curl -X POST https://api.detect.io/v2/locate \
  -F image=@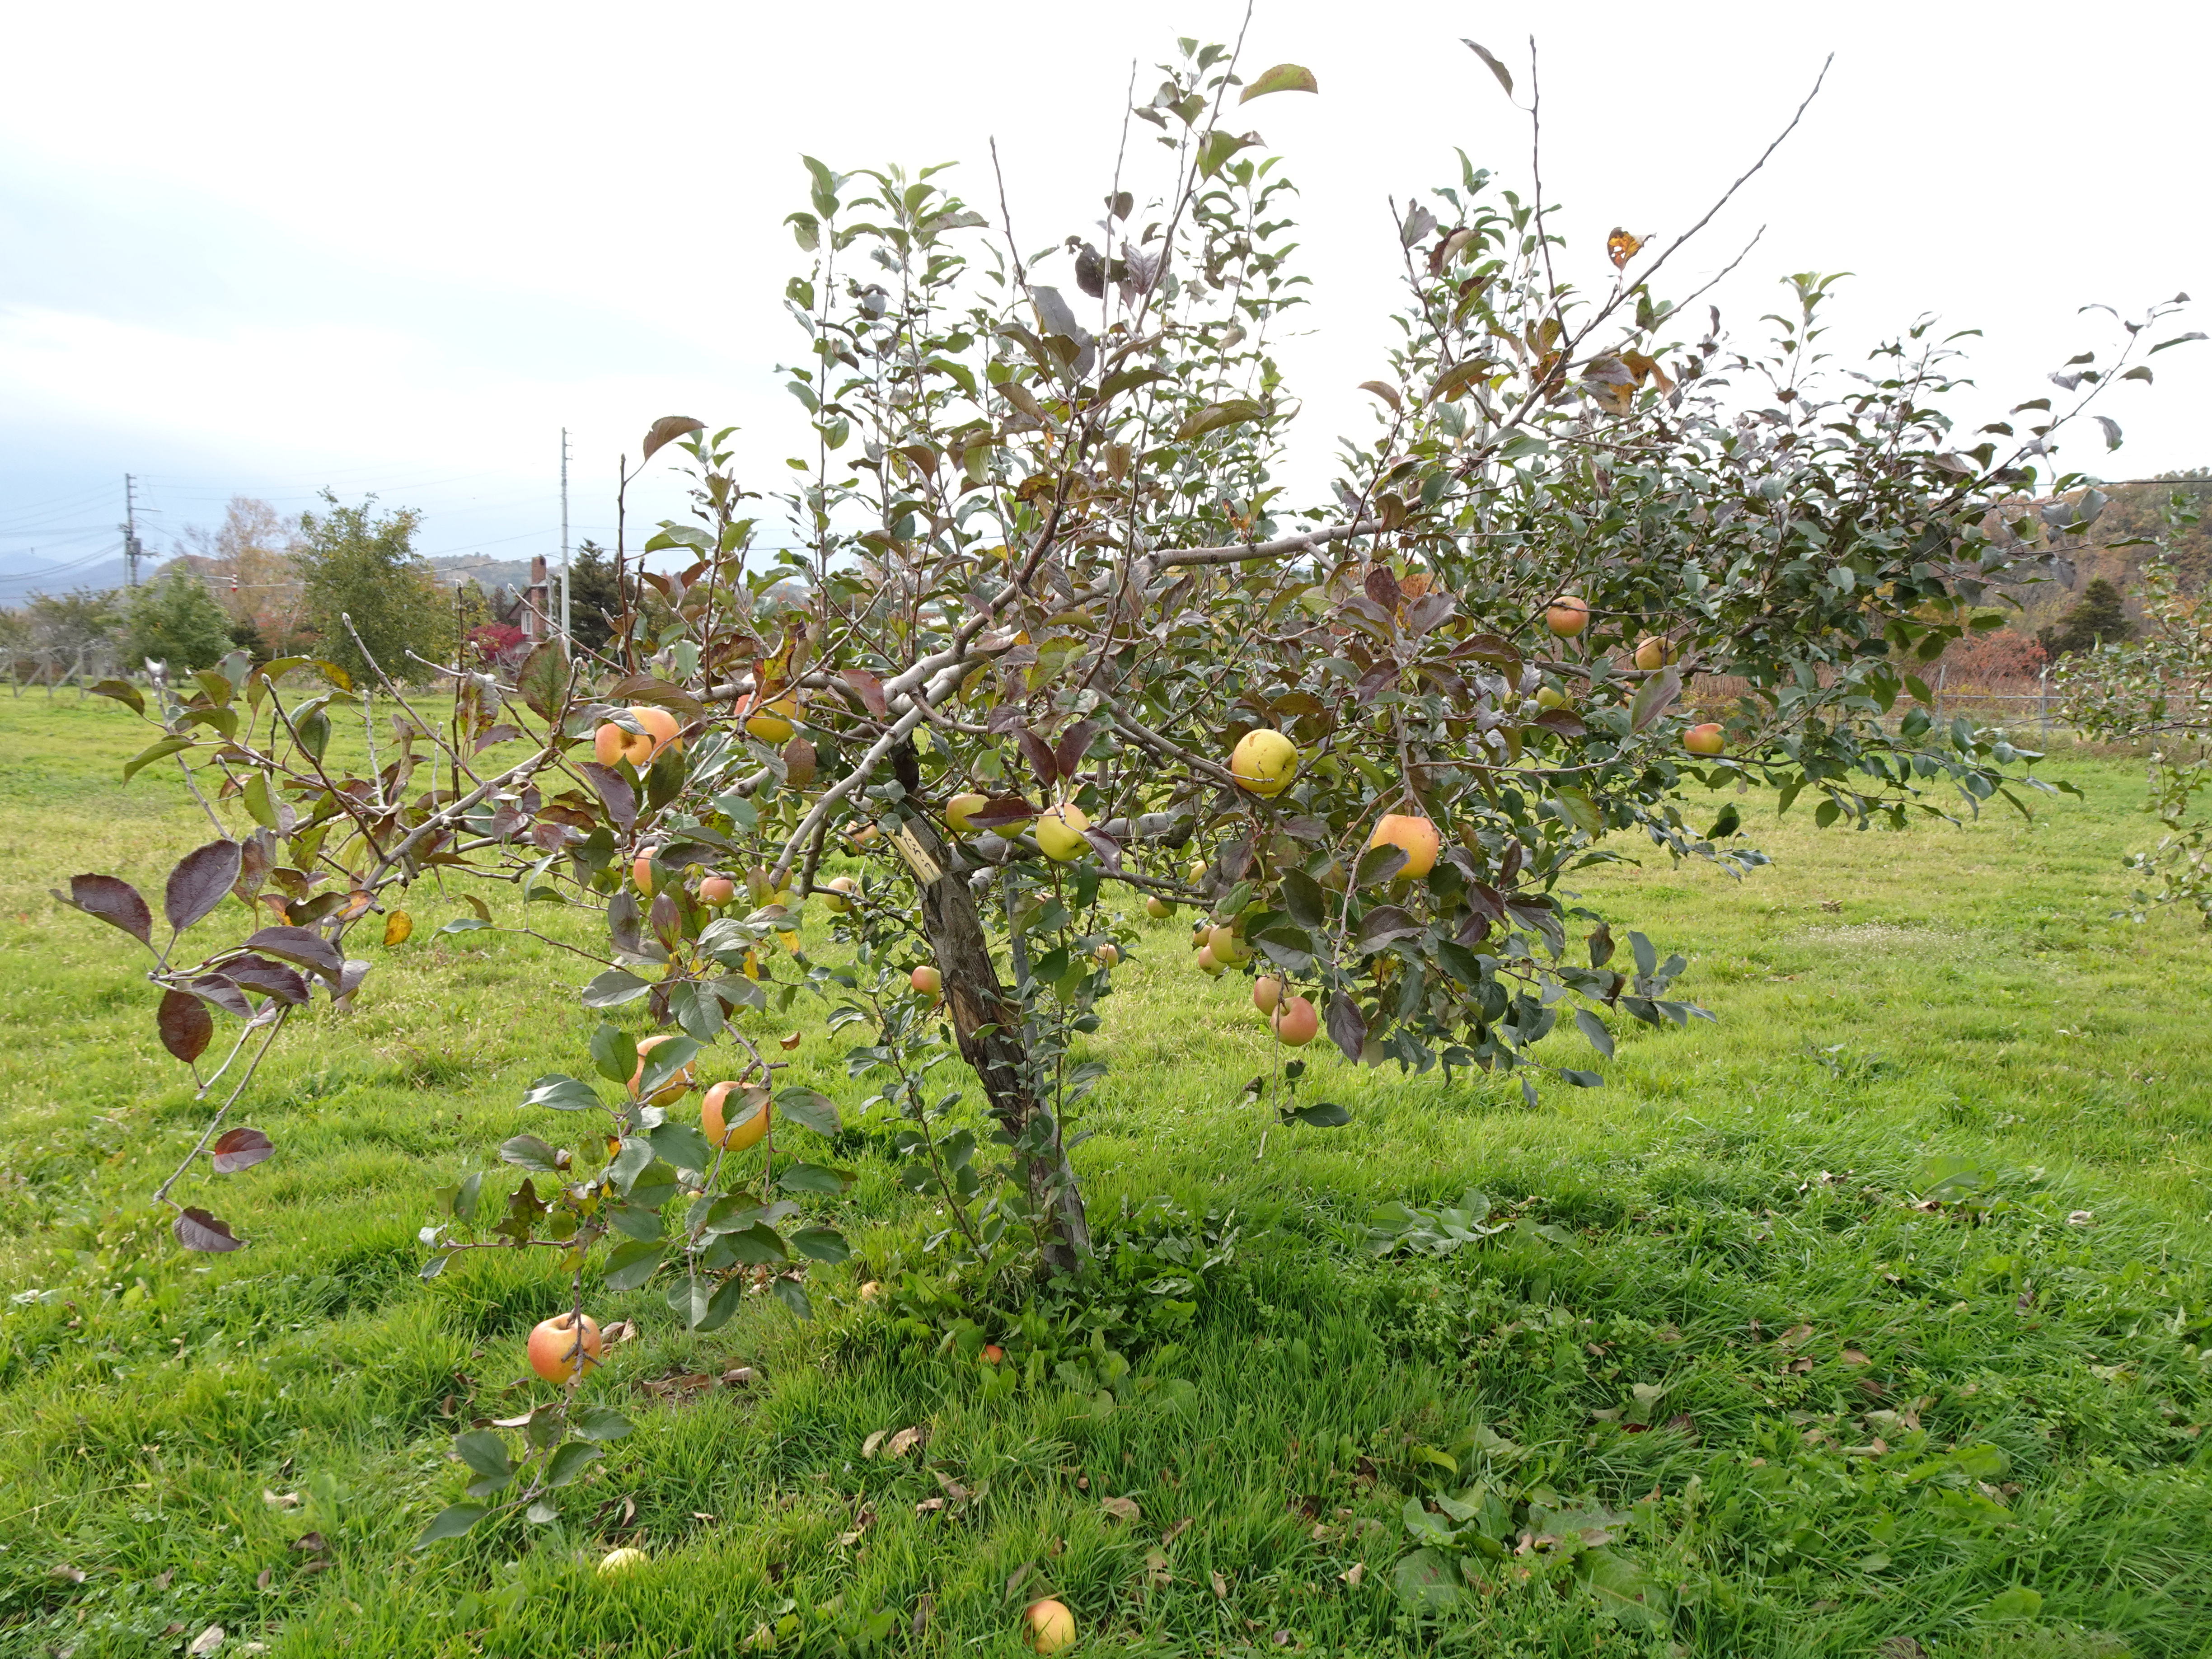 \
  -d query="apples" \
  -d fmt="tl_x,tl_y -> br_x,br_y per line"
991,792 -> 1031,839
701,1080 -> 770,1151
1209,924 -> 1251,963
1614,696 -> 1633,709
595,723 -> 652,767
699,876 -> 734,908
1546,596 -> 1589,637
734,673 -> 807,743
1253,973 -> 1294,1016
1440,618 -> 1475,641
1193,925 -> 1213,947
1231,728 -> 1298,793
627,1036 -> 694,1106
944,1002 -> 955,1021
1146,896 -> 1171,918
932,992 -> 942,1007
946,793 -> 990,832
1270,996 -> 1318,1046
824,877 -> 860,913
845,819 -> 880,855
1635,636 -> 1677,670
1035,803 -> 1090,862
528,1312 -> 601,1384
1092,943 -> 1119,969
760,862 -> 793,894
1186,860 -> 1207,885
1504,690 -> 1536,719
944,826 -> 964,843
1227,959 -> 1250,970
633,846 -> 658,898
911,966 -> 941,996
1371,814 -> 1439,880
1536,686 -> 1573,710
625,706 -> 682,763
1199,945 -> 1226,975
1683,723 -> 1725,754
